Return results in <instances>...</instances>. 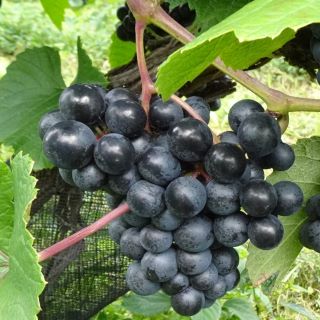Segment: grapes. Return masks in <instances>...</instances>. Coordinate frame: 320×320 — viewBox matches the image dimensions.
Masks as SVG:
<instances>
[{
	"label": "grapes",
	"mask_w": 320,
	"mask_h": 320,
	"mask_svg": "<svg viewBox=\"0 0 320 320\" xmlns=\"http://www.w3.org/2000/svg\"><path fill=\"white\" fill-rule=\"evenodd\" d=\"M140 96L73 84L41 117L38 134L64 182L105 190L111 211L122 199L132 210L109 230L121 252L138 259L128 288L143 296L162 289L175 312L194 315L238 285L233 247L248 238L262 250L281 244L278 215L299 212L303 193L296 183L264 180L263 169L288 170L295 154L281 141L278 117L257 101H237L234 131L213 145L205 124L162 95L149 101L146 131Z\"/></svg>",
	"instance_id": "grapes-1"
},
{
	"label": "grapes",
	"mask_w": 320,
	"mask_h": 320,
	"mask_svg": "<svg viewBox=\"0 0 320 320\" xmlns=\"http://www.w3.org/2000/svg\"><path fill=\"white\" fill-rule=\"evenodd\" d=\"M308 218L299 228L300 242L307 249L320 252V191L306 203Z\"/></svg>",
	"instance_id": "grapes-2"
},
{
	"label": "grapes",
	"mask_w": 320,
	"mask_h": 320,
	"mask_svg": "<svg viewBox=\"0 0 320 320\" xmlns=\"http://www.w3.org/2000/svg\"><path fill=\"white\" fill-rule=\"evenodd\" d=\"M190 107L208 124L210 120V111H217L221 107V99L215 98L213 101L204 102L203 97L191 96L185 100Z\"/></svg>",
	"instance_id": "grapes-3"
},
{
	"label": "grapes",
	"mask_w": 320,
	"mask_h": 320,
	"mask_svg": "<svg viewBox=\"0 0 320 320\" xmlns=\"http://www.w3.org/2000/svg\"><path fill=\"white\" fill-rule=\"evenodd\" d=\"M313 38L310 43V50L313 56L320 58V23L312 24Z\"/></svg>",
	"instance_id": "grapes-4"
},
{
	"label": "grapes",
	"mask_w": 320,
	"mask_h": 320,
	"mask_svg": "<svg viewBox=\"0 0 320 320\" xmlns=\"http://www.w3.org/2000/svg\"><path fill=\"white\" fill-rule=\"evenodd\" d=\"M317 81L320 84V68H319V70L317 72Z\"/></svg>",
	"instance_id": "grapes-5"
}]
</instances>
